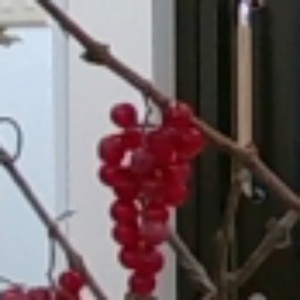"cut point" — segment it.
<instances>
[{"mask_svg":"<svg viewBox=\"0 0 300 300\" xmlns=\"http://www.w3.org/2000/svg\"><path fill=\"white\" fill-rule=\"evenodd\" d=\"M143 98H144V106L148 109V113L145 115L144 124L148 123V115L152 113V108L148 106V98L149 96L142 92Z\"/></svg>","mask_w":300,"mask_h":300,"instance_id":"obj_1","label":"cut point"}]
</instances>
